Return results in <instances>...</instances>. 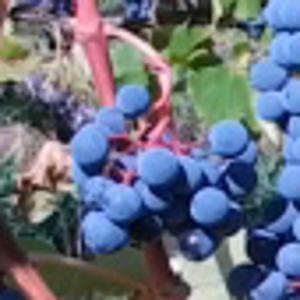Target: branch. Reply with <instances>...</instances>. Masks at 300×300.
<instances>
[{"instance_id": "30e6481e", "label": "branch", "mask_w": 300, "mask_h": 300, "mask_svg": "<svg viewBox=\"0 0 300 300\" xmlns=\"http://www.w3.org/2000/svg\"><path fill=\"white\" fill-rule=\"evenodd\" d=\"M76 22L81 35L86 63L91 71L94 90L100 103L109 105L115 99L113 64L106 34L101 32L98 0H75Z\"/></svg>"}, {"instance_id": "325d2c04", "label": "branch", "mask_w": 300, "mask_h": 300, "mask_svg": "<svg viewBox=\"0 0 300 300\" xmlns=\"http://www.w3.org/2000/svg\"><path fill=\"white\" fill-rule=\"evenodd\" d=\"M0 263L28 300H61L59 291L37 274L16 230L5 218H0Z\"/></svg>"}, {"instance_id": "170604dd", "label": "branch", "mask_w": 300, "mask_h": 300, "mask_svg": "<svg viewBox=\"0 0 300 300\" xmlns=\"http://www.w3.org/2000/svg\"><path fill=\"white\" fill-rule=\"evenodd\" d=\"M147 260L153 273L155 300H187L177 278L165 241L155 239L146 246Z\"/></svg>"}]
</instances>
